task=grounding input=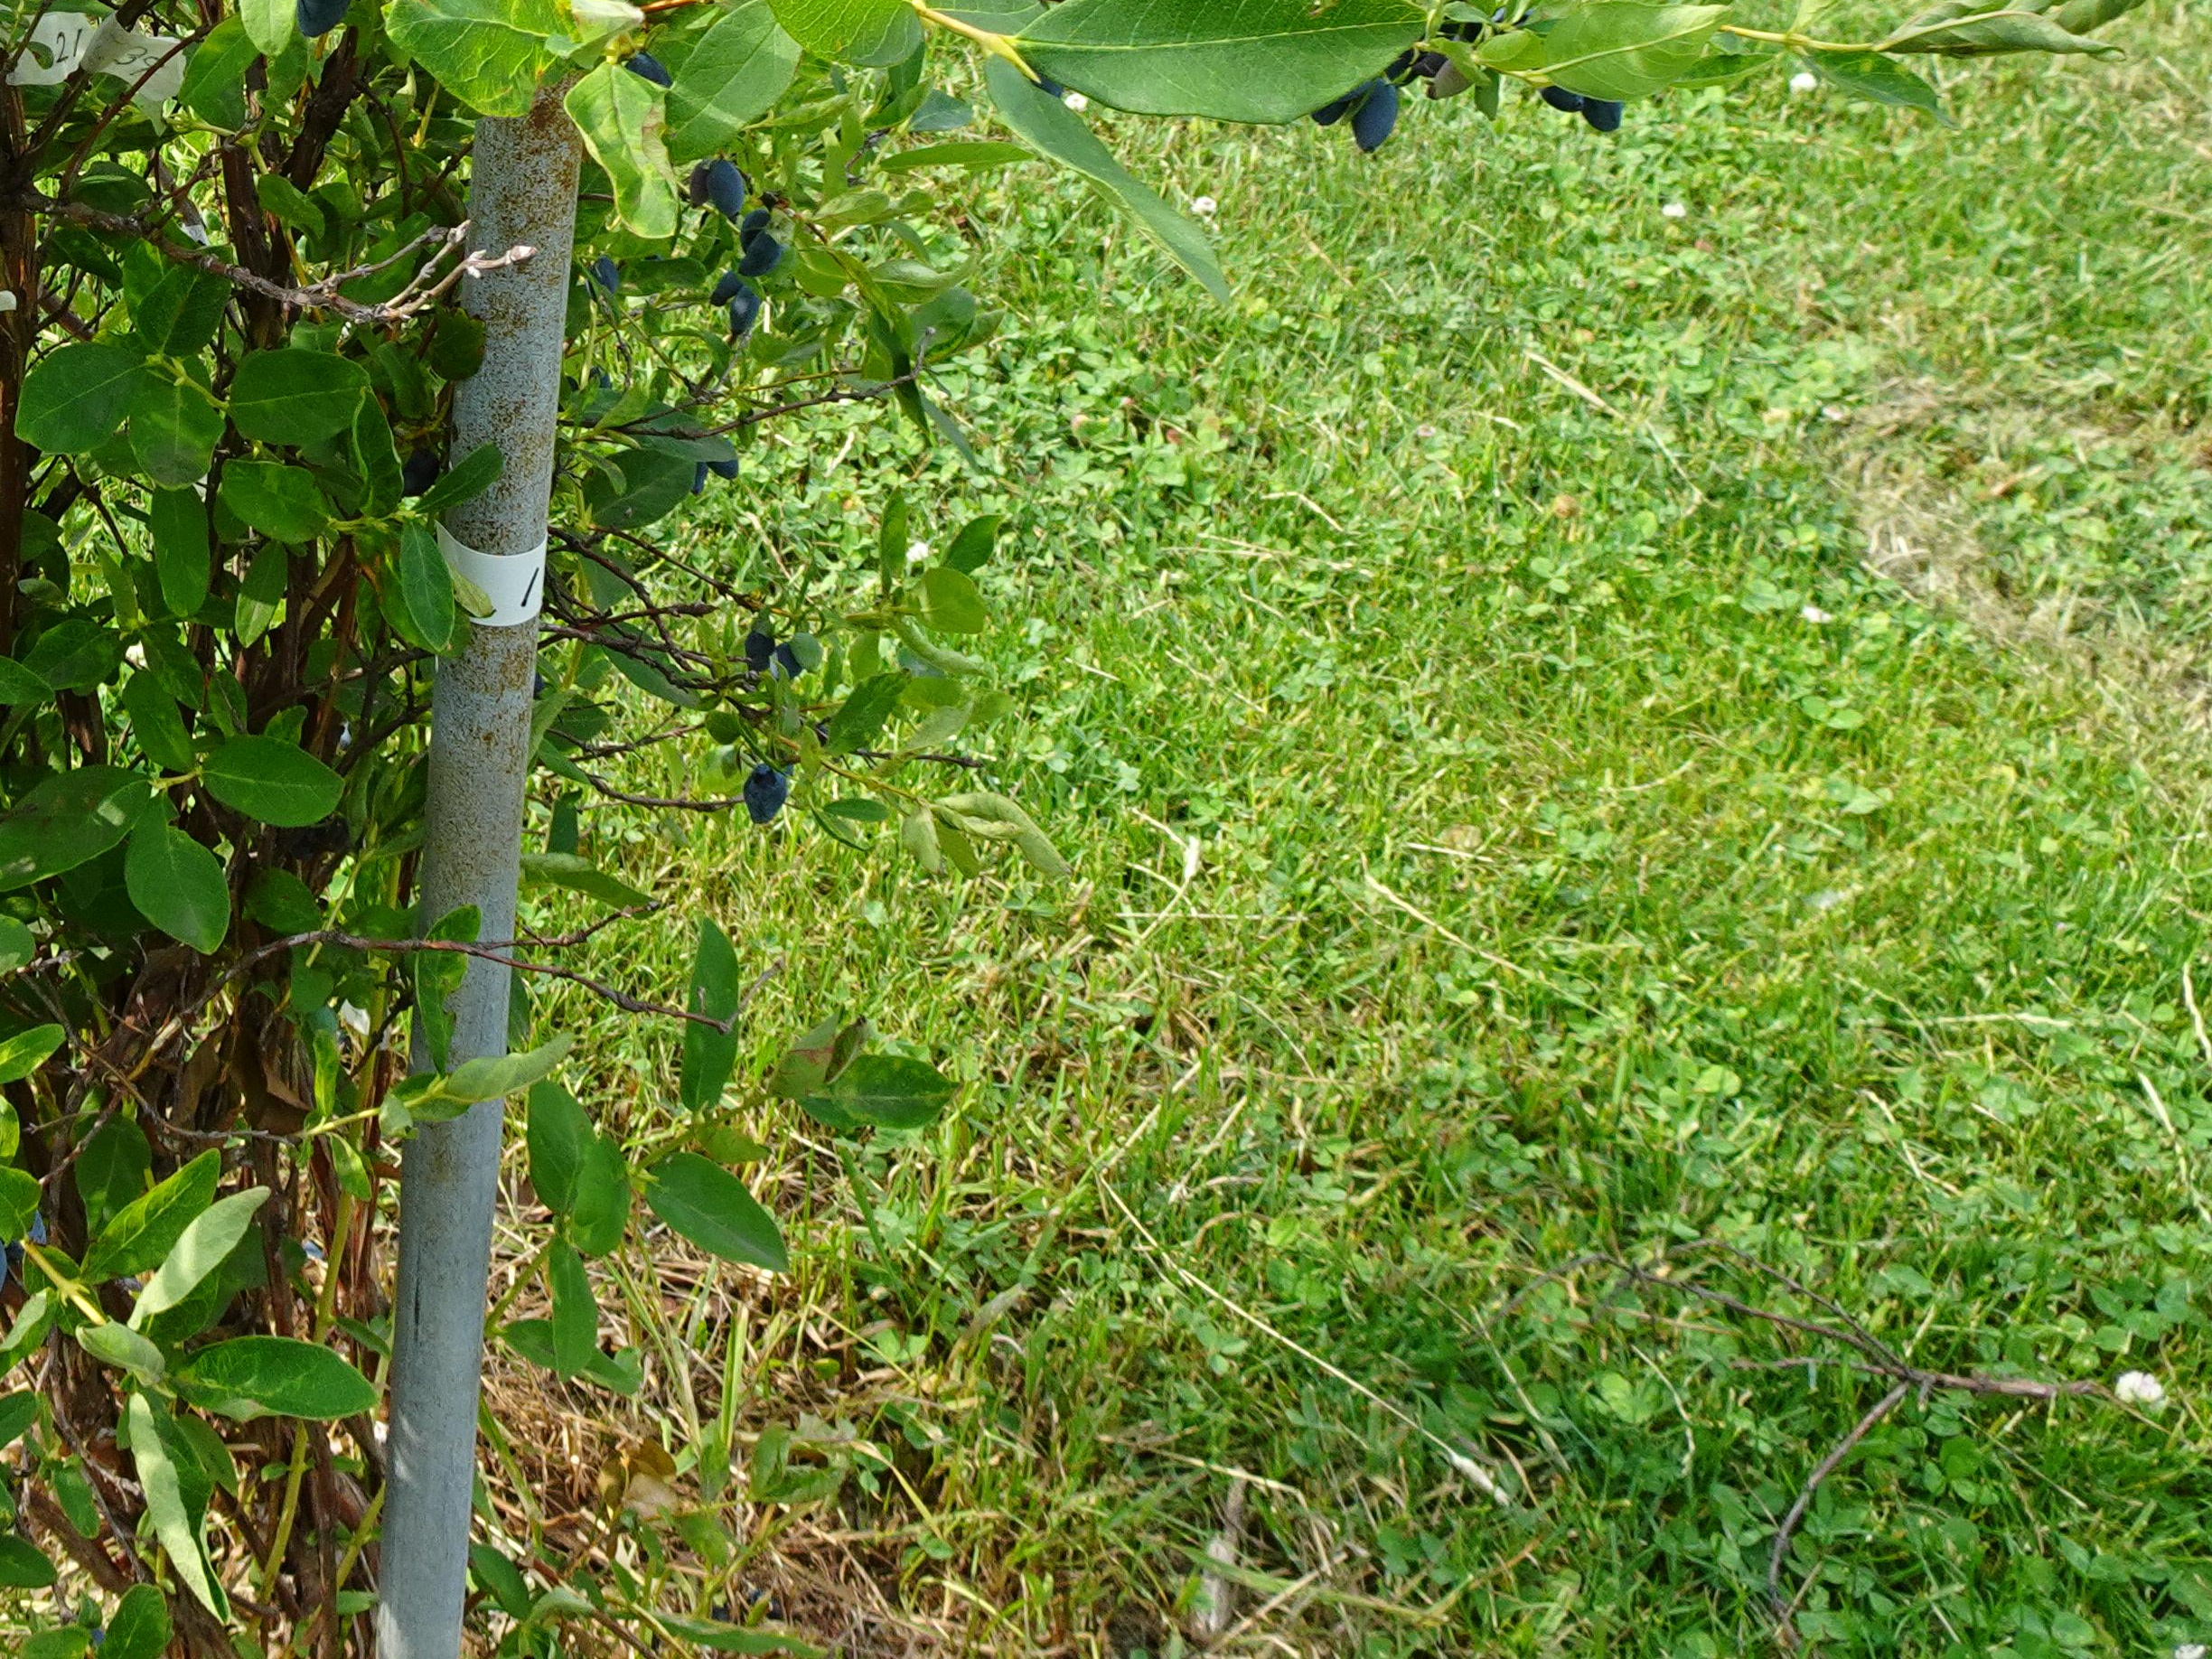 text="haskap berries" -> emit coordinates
[532,673,543,700]
[624,53,675,84]
[1350,81,1397,154]
[1033,78,1065,95]
[695,462,707,495]
[687,162,713,206]
[776,643,802,675]
[1543,90,1585,111]
[743,766,789,826]
[710,162,743,214]
[1476,67,1499,120]
[1413,55,1445,75]
[1427,62,1475,98]
[731,287,761,335]
[589,365,610,387]
[712,274,744,302]
[791,633,823,665]
[590,255,621,298]
[741,210,772,251]
[709,460,739,479]
[296,0,356,40]
[402,452,438,493]
[745,635,777,667]
[738,234,784,279]
[1385,49,1420,85]
[29,1212,46,1247]
[1585,96,1624,133]
[1311,103,1348,126]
